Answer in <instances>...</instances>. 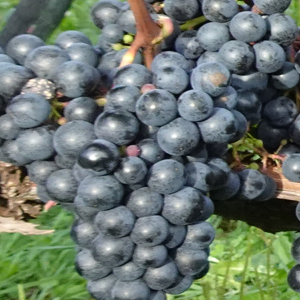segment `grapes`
Returning a JSON list of instances; mask_svg holds the SVG:
<instances>
[{
	"label": "grapes",
	"instance_id": "obj_2",
	"mask_svg": "<svg viewBox=\"0 0 300 300\" xmlns=\"http://www.w3.org/2000/svg\"><path fill=\"white\" fill-rule=\"evenodd\" d=\"M291 257L296 263L287 275L288 286L296 293H300V237L295 238L291 245Z\"/></svg>",
	"mask_w": 300,
	"mask_h": 300
},
{
	"label": "grapes",
	"instance_id": "obj_1",
	"mask_svg": "<svg viewBox=\"0 0 300 300\" xmlns=\"http://www.w3.org/2000/svg\"><path fill=\"white\" fill-rule=\"evenodd\" d=\"M289 0H143L173 33L117 67L136 39L122 0L103 30L0 53V160L46 205L71 210L75 268L95 300H166L208 271L213 201L266 202L300 182V27Z\"/></svg>",
	"mask_w": 300,
	"mask_h": 300
}]
</instances>
